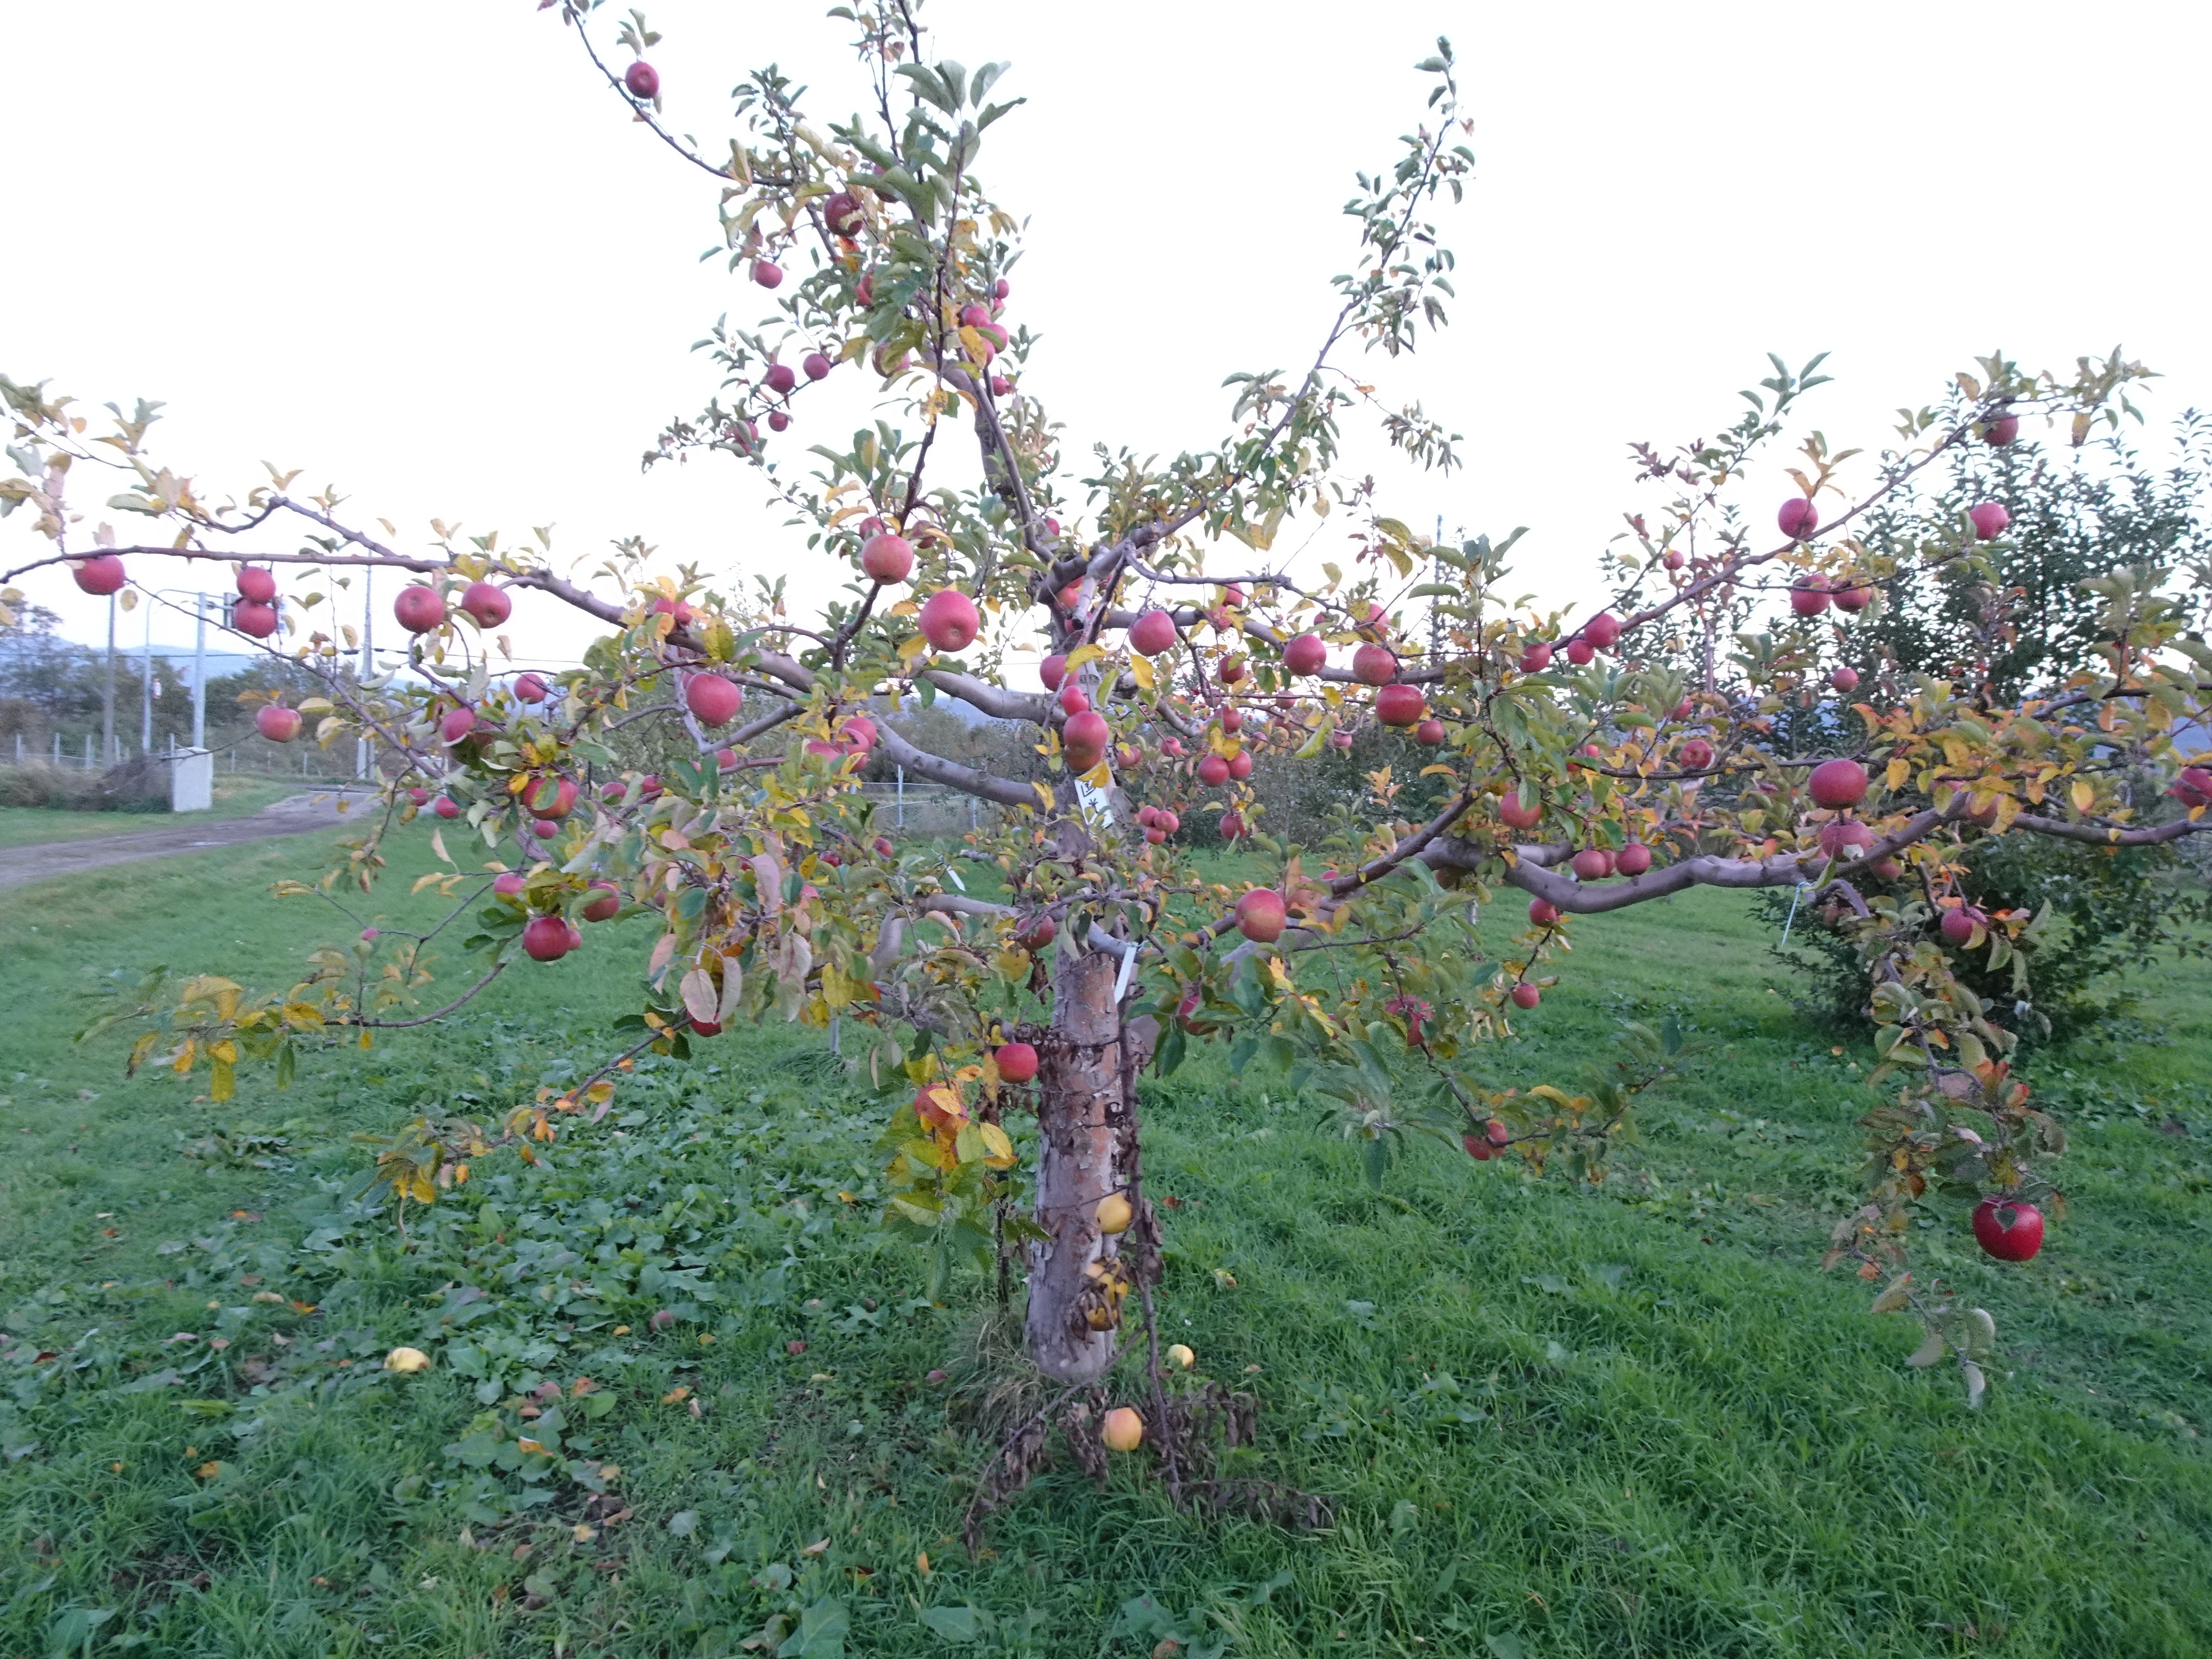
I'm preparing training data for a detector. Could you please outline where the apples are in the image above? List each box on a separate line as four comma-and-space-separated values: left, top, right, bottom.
513, 670, 551, 706
1175, 781, 1183, 792
935, 1103, 971, 1139
918, 589, 980, 654
845, 183, 866, 209
1039, 654, 1083, 694
1064, 710, 1109, 759
857, 513, 902, 542
751, 258, 785, 290
1931, 768, 1971, 809
763, 362, 796, 395
450, 720, 503, 774
1755, 781, 1782, 810
1980, 607, 1996, 622
1511, 983, 1542, 1008
1129, 609, 1177, 657
687, 1001, 728, 1039
232, 602, 282, 638
1218, 654, 1246, 686
838, 716, 877, 744
1570, 846, 1609, 881
1220, 811, 1251, 840
1084, 1258, 1131, 1302
659, 643, 689, 665
1284, 632, 1328, 677
1808, 758, 1868, 811
1498, 781, 1548, 827
817, 846, 848, 874
1323, 1012, 1347, 1040
2176, 762, 2212, 811
1778, 496, 1820, 540
1461, 1119, 1509, 1163
864, 263, 900, 301
766, 408, 792, 433
987, 278, 1010, 299
1136, 803, 1161, 830
1089, 1306, 1119, 1333
1177, 992, 1220, 1037
1213, 706, 1244, 736
624, 63, 661, 100
403, 778, 432, 810
864, 835, 897, 859
733, 856, 762, 882
848, 279, 880, 307
1693, 571, 1716, 593
1822, 903, 1857, 934
1282, 874, 1318, 919
655, 593, 693, 627
1833, 573, 1872, 613
825, 730, 869, 771
1274, 689, 1299, 709
849, 980, 884, 1022
1820, 816, 1872, 864
1459, 809, 1495, 842
1195, 754, 1232, 790
676, 758, 703, 784
1154, 808, 1180, 833
1374, 684, 1427, 727
2010, 586, 2029, 600
1099, 570, 1125, 591
1680, 739, 1714, 774
1206, 603, 1235, 632
641, 858, 686, 912
1786, 691, 1818, 711
1145, 496, 1171, 517
1058, 684, 1096, 718
1224, 746, 1254, 781
1660, 691, 1694, 723
1331, 730, 1356, 749
731, 421, 762, 444
519, 775, 581, 824
1139, 878, 1165, 912
1115, 745, 1142, 770
1967, 501, 2010, 542
433, 790, 464, 817
1869, 852, 1905, 883
637, 768, 669, 801
1563, 757, 1584, 775
1830, 665, 1859, 694
1997, 601, 2014, 617
1661, 549, 1683, 571
1322, 715, 1344, 734
910, 517, 939, 550
1410, 825, 1425, 837
1237, 889, 1289, 943
1950, 667, 1967, 681
710, 750, 739, 773
236, 566, 277, 604
1383, 997, 1436, 1051
1056, 566, 1087, 589
1780, 786, 1800, 808
1065, 610, 1097, 640
71, 551, 128, 596
523, 918, 572, 963
692, 644, 714, 669
257, 706, 303, 743
1435, 864, 1472, 893
1270, 711, 1300, 730
1616, 841, 1651, 875
801, 352, 836, 380
1971, 1195, 2047, 1264
726, 437, 755, 459
436, 705, 479, 750
961, 338, 995, 370
532, 816, 558, 840
1997, 625, 2017, 643
393, 586, 446, 634
1566, 806, 1596, 826
1585, 613, 1622, 647
1416, 721, 1447, 746
577, 878, 619, 922
1528, 891, 1568, 929
1978, 409, 2020, 445
1054, 588, 1084, 614
1942, 906, 1990, 949
1339, 999, 1375, 1033
1059, 737, 1105, 776
1567, 637, 1596, 667
717, 932, 754, 969
1800, 837, 1838, 869
1311, 610, 1338, 630
915, 1077, 963, 1131
961, 304, 991, 329
1248, 731, 1269, 753
869, 340, 913, 378
1745, 718, 1774, 743
1389, 823, 1412, 844
801, 884, 839, 918
1010, 907, 1058, 950
595, 779, 632, 809
1580, 745, 1600, 760
975, 322, 1009, 355
1516, 641, 1552, 675
460, 582, 512, 627
491, 871, 527, 905
984, 377, 1010, 398
1791, 573, 1832, 616
1095, 1197, 1135, 1235
1033, 517, 1060, 540
822, 192, 867, 239
1353, 643, 1397, 688
1143, 824, 1165, 845
705, 838, 733, 862
860, 534, 916, 584
2109, 641, 2133, 666
1591, 848, 1620, 875
686, 676, 743, 727
1965, 789, 2022, 827
1201, 690, 1226, 708
558, 924, 584, 951
1214, 580, 1246, 608
1322, 867, 1352, 900
795, 731, 846, 786
1158, 737, 1182, 758
1354, 604, 1390, 642
871, 158, 917, 205
994, 1038, 1039, 1086
981, 296, 1006, 320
